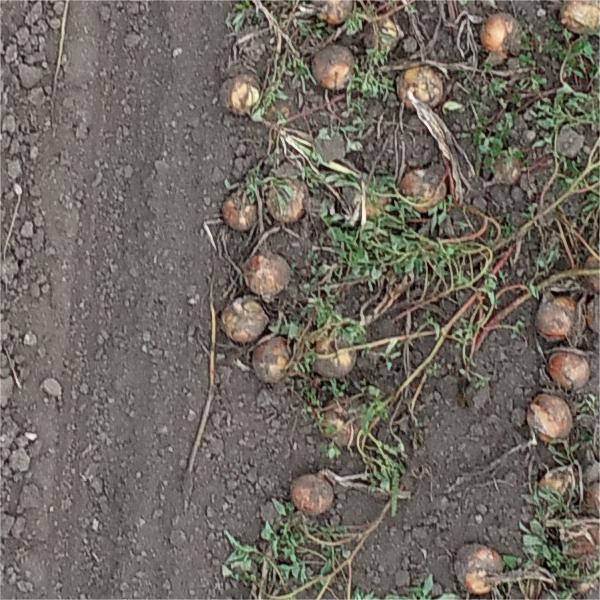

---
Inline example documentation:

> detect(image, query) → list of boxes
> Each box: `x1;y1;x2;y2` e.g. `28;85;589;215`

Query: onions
478;13;516;54
560;1;597;35
222;197;255;229
535;294;578;343
222;296;265;342
586;297;600;333
243;251;287;296
316;346;353;378
310;44;352;88
397;162;444;209
314;0;347;29
492;151;525;182
527;393;571;441
318;402;355;447
539;464;582;501
400;65;447;107
547;347;589;388
559;517;593;562
456;541;502;594
264;178;305;221
249;337;291;381
584;254;600;290
289;473;332;516
347;187;389;223
223;79;257;113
